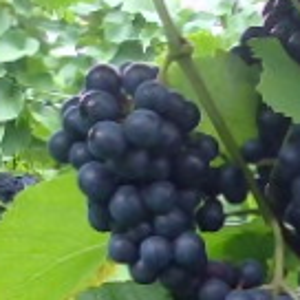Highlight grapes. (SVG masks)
<instances>
[{
	"label": "grapes",
	"instance_id": "grapes-1",
	"mask_svg": "<svg viewBox=\"0 0 300 300\" xmlns=\"http://www.w3.org/2000/svg\"><path fill=\"white\" fill-rule=\"evenodd\" d=\"M159 69L125 61L94 65L83 94L61 106L49 141L53 160L78 170L86 217L111 233L110 257L138 284L157 282L171 300H300V291L266 282L259 261L210 259L196 233L223 225L218 196L243 204L250 189L240 167L224 162L217 138L193 131L194 101L158 80Z\"/></svg>",
	"mask_w": 300,
	"mask_h": 300
}]
</instances>
